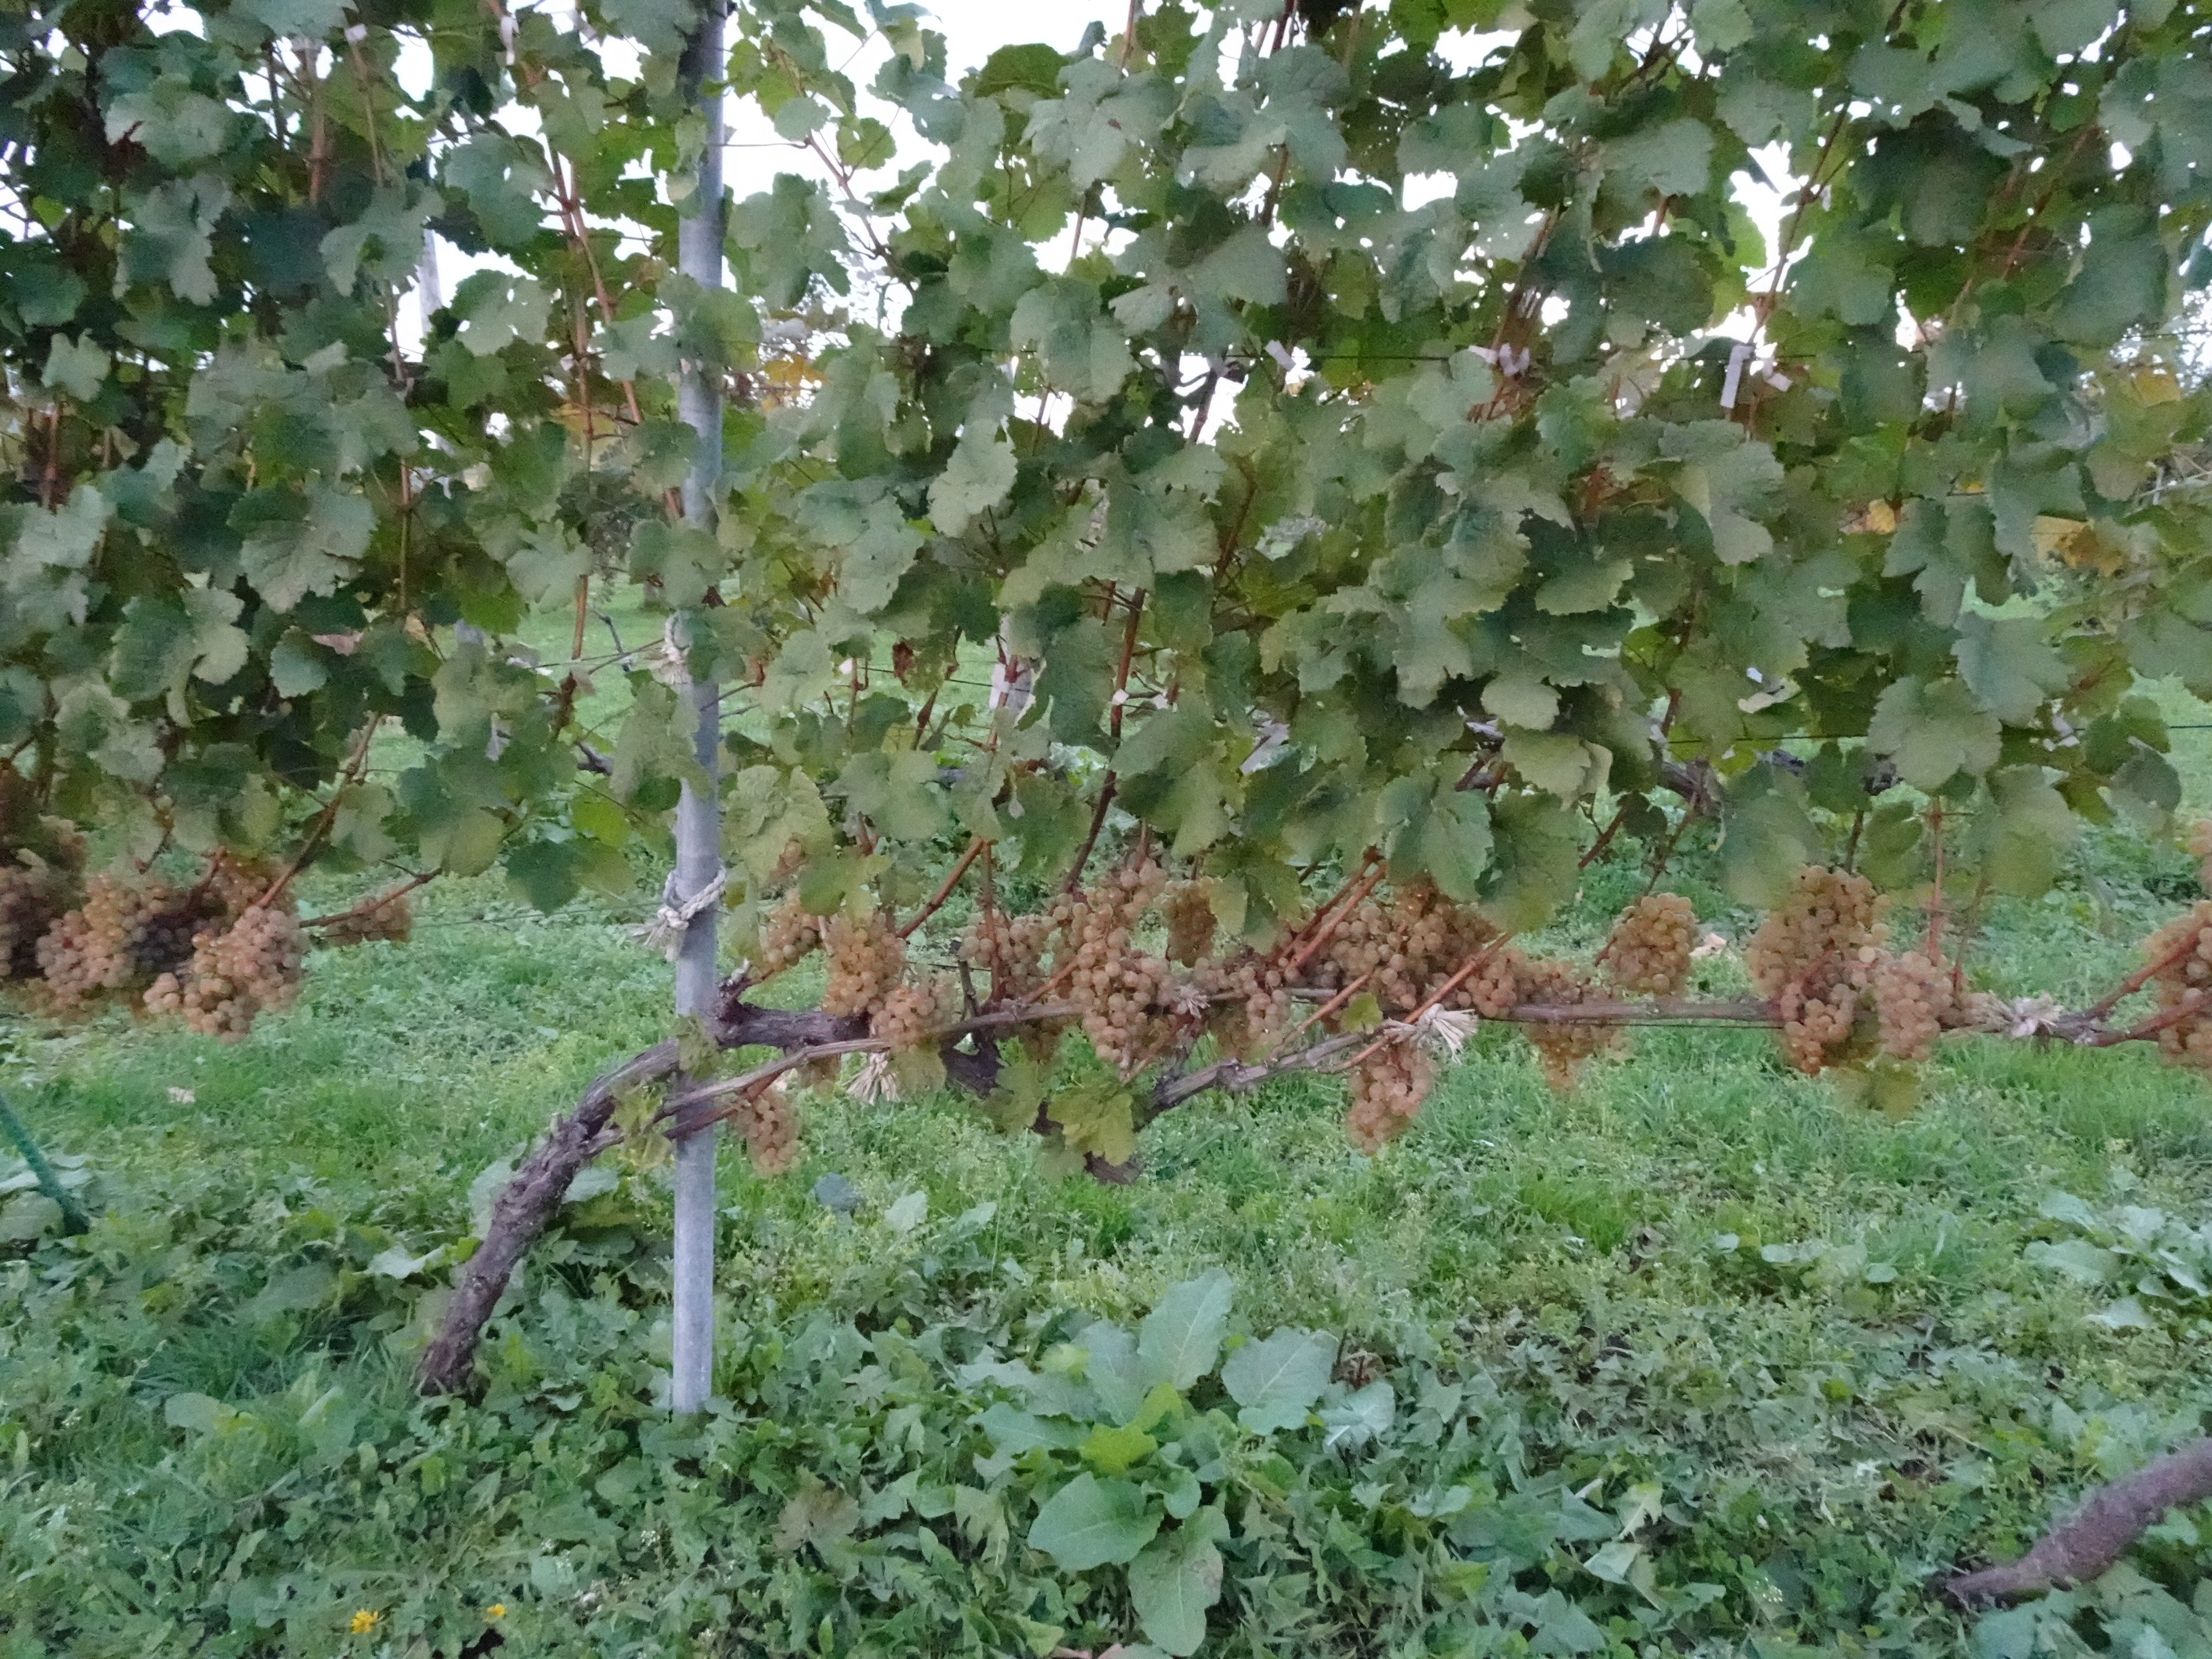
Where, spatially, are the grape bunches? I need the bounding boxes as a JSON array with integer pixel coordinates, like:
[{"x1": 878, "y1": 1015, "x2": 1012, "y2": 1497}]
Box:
[
  {"x1": 1784, "y1": 983, "x2": 1860, "y2": 1081},
  {"x1": 90, "y1": 864, "x2": 192, "y2": 962},
  {"x1": 871, "y1": 970, "x2": 955, "y2": 1041},
  {"x1": 1742, "y1": 858, "x2": 1891, "y2": 1005},
  {"x1": 1374, "y1": 883, "x2": 1502, "y2": 963},
  {"x1": 318, "y1": 882, "x2": 423, "y2": 952},
  {"x1": 17, "y1": 979, "x2": 108, "y2": 1031},
  {"x1": 2189, "y1": 817, "x2": 2212, "y2": 906},
  {"x1": 2, "y1": 866, "x2": 42, "y2": 980},
  {"x1": 144, "y1": 970, "x2": 260, "y2": 1045},
  {"x1": 729, "y1": 1083, "x2": 800, "y2": 1178},
  {"x1": 2142, "y1": 900, "x2": 2212, "y2": 1064},
  {"x1": 194, "y1": 907, "x2": 317, "y2": 1015},
  {"x1": 1345, "y1": 1033, "x2": 1438, "y2": 1153},
  {"x1": 957, "y1": 905, "x2": 1049, "y2": 998},
  {"x1": 1869, "y1": 949, "x2": 1956, "y2": 1068},
  {"x1": 1191, "y1": 946, "x2": 1256, "y2": 995},
  {"x1": 867, "y1": 928, "x2": 914, "y2": 992},
  {"x1": 1163, "y1": 876, "x2": 1223, "y2": 971},
  {"x1": 820, "y1": 903, "x2": 884, "y2": 1019},
  {"x1": 755, "y1": 890, "x2": 823, "y2": 972},
  {"x1": 210, "y1": 860, "x2": 269, "y2": 912},
  {"x1": 38, "y1": 909, "x2": 142, "y2": 1003},
  {"x1": 1330, "y1": 900, "x2": 1449, "y2": 1006},
  {"x1": 1291, "y1": 955, "x2": 1352, "y2": 990},
  {"x1": 1216, "y1": 953, "x2": 1299, "y2": 1059},
  {"x1": 1448, "y1": 954, "x2": 1576, "y2": 1020},
  {"x1": 1521, "y1": 1019, "x2": 1599, "y2": 1092},
  {"x1": 1603, "y1": 889, "x2": 1702, "y2": 1004},
  {"x1": 1068, "y1": 952, "x2": 1181, "y2": 1074},
  {"x1": 1274, "y1": 898, "x2": 1322, "y2": 950},
  {"x1": 1090, "y1": 862, "x2": 1170, "y2": 921},
  {"x1": 1009, "y1": 989, "x2": 1069, "y2": 1068},
  {"x1": 1045, "y1": 889, "x2": 1134, "y2": 972}
]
